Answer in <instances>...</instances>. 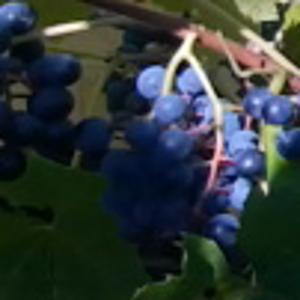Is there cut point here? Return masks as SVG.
Returning a JSON list of instances; mask_svg holds the SVG:
<instances>
[{
    "mask_svg": "<svg viewBox=\"0 0 300 300\" xmlns=\"http://www.w3.org/2000/svg\"><path fill=\"white\" fill-rule=\"evenodd\" d=\"M194 46V39L186 36L174 56L168 61L162 75V91L170 94L173 91V79L179 66L184 63L192 75L198 80L207 96V103L215 119L223 116L222 105L219 102L218 92L209 75L190 53Z\"/></svg>",
    "mask_w": 300,
    "mask_h": 300,
    "instance_id": "obj_1",
    "label": "cut point"
}]
</instances>
